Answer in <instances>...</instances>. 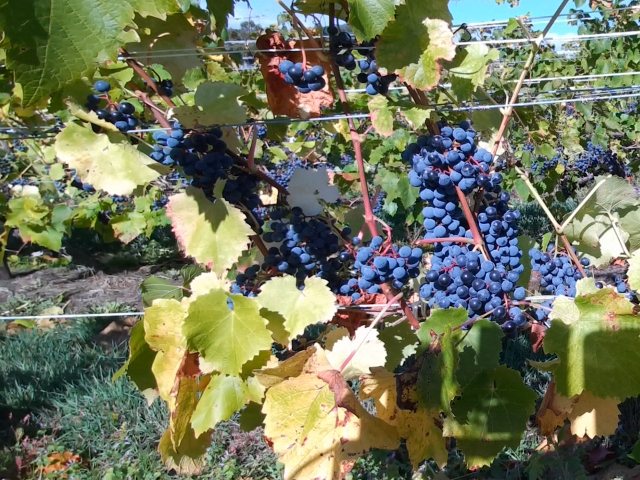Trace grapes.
Here are the masks:
<instances>
[{
	"mask_svg": "<svg viewBox=\"0 0 640 480\" xmlns=\"http://www.w3.org/2000/svg\"><path fill=\"white\" fill-rule=\"evenodd\" d=\"M509 201L510 194L502 192L499 201L491 202L476 216L491 261H483L479 251H472L471 243L461 246L446 241L432 245V267L425 273L428 283L418 287L419 296L430 299V307L436 303L441 309L461 306L469 311V321L494 310L486 319L496 321L507 317V308L499 295L501 291H512L515 301L526 297L525 288L516 286L524 271V265L520 263L524 251L517 246L519 228L514 225L521 213L508 210Z\"/></svg>",
	"mask_w": 640,
	"mask_h": 480,
	"instance_id": "grapes-1",
	"label": "grapes"
},
{
	"mask_svg": "<svg viewBox=\"0 0 640 480\" xmlns=\"http://www.w3.org/2000/svg\"><path fill=\"white\" fill-rule=\"evenodd\" d=\"M469 127L467 120H462L455 129L442 126L441 134H422L401 153V158L413 167L407 173L408 183L417 187L422 201L430 203V207L421 211L426 230L423 239H474L471 231L465 230L457 219L463 216V211L458 206L455 185L464 194H470L476 186L495 194L502 191L501 173L484 174L494 162V156L486 149L477 148L476 132ZM466 154L480 165L464 162Z\"/></svg>",
	"mask_w": 640,
	"mask_h": 480,
	"instance_id": "grapes-2",
	"label": "grapes"
},
{
	"mask_svg": "<svg viewBox=\"0 0 640 480\" xmlns=\"http://www.w3.org/2000/svg\"><path fill=\"white\" fill-rule=\"evenodd\" d=\"M385 239L379 235L373 236L369 242V247H358L353 271L360 269L359 281L350 279L347 284L341 285L339 291L347 295L356 287L366 289L369 294H381L382 283H390L395 290H401L409 283V278H417L421 274L420 258L423 256L421 248H411L410 246L391 245L398 257L378 256L372 258L373 266L365 263L380 249Z\"/></svg>",
	"mask_w": 640,
	"mask_h": 480,
	"instance_id": "grapes-3",
	"label": "grapes"
},
{
	"mask_svg": "<svg viewBox=\"0 0 640 480\" xmlns=\"http://www.w3.org/2000/svg\"><path fill=\"white\" fill-rule=\"evenodd\" d=\"M528 255L532 258L530 269L539 271L542 276L541 287L551 291L552 295L576 296V282L583 276L575 265L570 264L569 255H559L554 258L553 254L548 255L537 248H529Z\"/></svg>",
	"mask_w": 640,
	"mask_h": 480,
	"instance_id": "grapes-4",
	"label": "grapes"
},
{
	"mask_svg": "<svg viewBox=\"0 0 640 480\" xmlns=\"http://www.w3.org/2000/svg\"><path fill=\"white\" fill-rule=\"evenodd\" d=\"M279 71L284 75V82L289 85H297L299 93L319 91L325 87V79L320 77L324 68L316 64L310 70H304L301 62L282 60L278 65Z\"/></svg>",
	"mask_w": 640,
	"mask_h": 480,
	"instance_id": "grapes-5",
	"label": "grapes"
},
{
	"mask_svg": "<svg viewBox=\"0 0 640 480\" xmlns=\"http://www.w3.org/2000/svg\"><path fill=\"white\" fill-rule=\"evenodd\" d=\"M85 108L93 110L96 113L98 119H105L106 122H110L115 125V128L121 133H126L128 129H137L139 127V121L135 115V106L124 101L117 105L116 110L108 111L106 109H99L100 96L97 94H90L87 97Z\"/></svg>",
	"mask_w": 640,
	"mask_h": 480,
	"instance_id": "grapes-6",
	"label": "grapes"
},
{
	"mask_svg": "<svg viewBox=\"0 0 640 480\" xmlns=\"http://www.w3.org/2000/svg\"><path fill=\"white\" fill-rule=\"evenodd\" d=\"M173 131L171 135L168 133H153L152 139L157 141L159 145H153L154 152H149L148 156L160 165H174L175 159L172 156V149L179 146L183 137V131L180 121L172 123Z\"/></svg>",
	"mask_w": 640,
	"mask_h": 480,
	"instance_id": "grapes-7",
	"label": "grapes"
},
{
	"mask_svg": "<svg viewBox=\"0 0 640 480\" xmlns=\"http://www.w3.org/2000/svg\"><path fill=\"white\" fill-rule=\"evenodd\" d=\"M285 246L290 249L289 255L292 257H298V262L304 264L306 270L313 269L317 265L315 256L312 253L310 246L299 247L297 243L303 240V236L296 231L295 227H289L285 233Z\"/></svg>",
	"mask_w": 640,
	"mask_h": 480,
	"instance_id": "grapes-8",
	"label": "grapes"
},
{
	"mask_svg": "<svg viewBox=\"0 0 640 480\" xmlns=\"http://www.w3.org/2000/svg\"><path fill=\"white\" fill-rule=\"evenodd\" d=\"M615 282L617 285L616 291L618 293H626L625 297L628 301H632L634 299V296L636 295V292L634 290L629 291V288L626 286V284L623 282V279L620 276H617L615 278Z\"/></svg>",
	"mask_w": 640,
	"mask_h": 480,
	"instance_id": "grapes-9",
	"label": "grapes"
},
{
	"mask_svg": "<svg viewBox=\"0 0 640 480\" xmlns=\"http://www.w3.org/2000/svg\"><path fill=\"white\" fill-rule=\"evenodd\" d=\"M332 268V263L329 261H323L320 265H319V269L320 271L317 274L318 278H321L322 280H329L330 279V273L327 272L328 270H330Z\"/></svg>",
	"mask_w": 640,
	"mask_h": 480,
	"instance_id": "grapes-10",
	"label": "grapes"
},
{
	"mask_svg": "<svg viewBox=\"0 0 640 480\" xmlns=\"http://www.w3.org/2000/svg\"><path fill=\"white\" fill-rule=\"evenodd\" d=\"M230 290L232 294H243L244 297H257V294L253 291L249 292L248 289H241L239 283H233L230 286Z\"/></svg>",
	"mask_w": 640,
	"mask_h": 480,
	"instance_id": "grapes-11",
	"label": "grapes"
},
{
	"mask_svg": "<svg viewBox=\"0 0 640 480\" xmlns=\"http://www.w3.org/2000/svg\"><path fill=\"white\" fill-rule=\"evenodd\" d=\"M357 67L361 70H367L370 69L372 72H376L377 68H376V59L375 58H371L369 60V62L367 60H359L357 62Z\"/></svg>",
	"mask_w": 640,
	"mask_h": 480,
	"instance_id": "grapes-12",
	"label": "grapes"
},
{
	"mask_svg": "<svg viewBox=\"0 0 640 480\" xmlns=\"http://www.w3.org/2000/svg\"><path fill=\"white\" fill-rule=\"evenodd\" d=\"M554 301H555V300L547 299L546 301L541 302V303H540V305H541L542 307H546V308H548V309L552 310V309H554V308H553V305H552V302H554Z\"/></svg>",
	"mask_w": 640,
	"mask_h": 480,
	"instance_id": "grapes-13",
	"label": "grapes"
}]
</instances>
